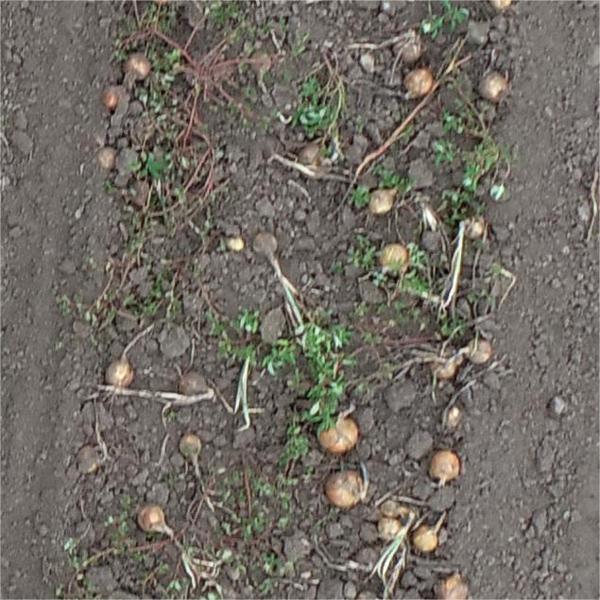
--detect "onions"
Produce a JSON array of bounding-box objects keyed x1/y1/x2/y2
[
  {"x1": 437, "y1": 571, "x2": 469, "y2": 599},
  {"x1": 431, "y1": 357, "x2": 456, "y2": 381},
  {"x1": 137, "y1": 503, "x2": 167, "y2": 533},
  {"x1": 224, "y1": 232, "x2": 244, "y2": 253},
  {"x1": 403, "y1": 66, "x2": 434, "y2": 95},
  {"x1": 378, "y1": 502, "x2": 395, "y2": 518},
  {"x1": 376, "y1": 518, "x2": 402, "y2": 539},
  {"x1": 461, "y1": 218, "x2": 488, "y2": 244},
  {"x1": 487, "y1": 0, "x2": 511, "y2": 9},
  {"x1": 74, "y1": 444, "x2": 102, "y2": 475},
  {"x1": 124, "y1": 53, "x2": 150, "y2": 81},
  {"x1": 476, "y1": 70, "x2": 507, "y2": 99},
  {"x1": 368, "y1": 188, "x2": 394, "y2": 214},
  {"x1": 412, "y1": 524, "x2": 439, "y2": 551},
  {"x1": 178, "y1": 433, "x2": 201, "y2": 456},
  {"x1": 378, "y1": 241, "x2": 406, "y2": 269},
  {"x1": 254, "y1": 231, "x2": 276, "y2": 254},
  {"x1": 464, "y1": 336, "x2": 492, "y2": 364},
  {"x1": 318, "y1": 414, "x2": 357, "y2": 451},
  {"x1": 441, "y1": 404, "x2": 464, "y2": 427},
  {"x1": 396, "y1": 31, "x2": 424, "y2": 63},
  {"x1": 298, "y1": 141, "x2": 326, "y2": 170},
  {"x1": 98, "y1": 85, "x2": 122, "y2": 111},
  {"x1": 104, "y1": 358, "x2": 132, "y2": 385},
  {"x1": 178, "y1": 366, "x2": 205, "y2": 396},
  {"x1": 426, "y1": 451, "x2": 461, "y2": 481},
  {"x1": 323, "y1": 468, "x2": 362, "y2": 507},
  {"x1": 92, "y1": 145, "x2": 117, "y2": 172}
]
